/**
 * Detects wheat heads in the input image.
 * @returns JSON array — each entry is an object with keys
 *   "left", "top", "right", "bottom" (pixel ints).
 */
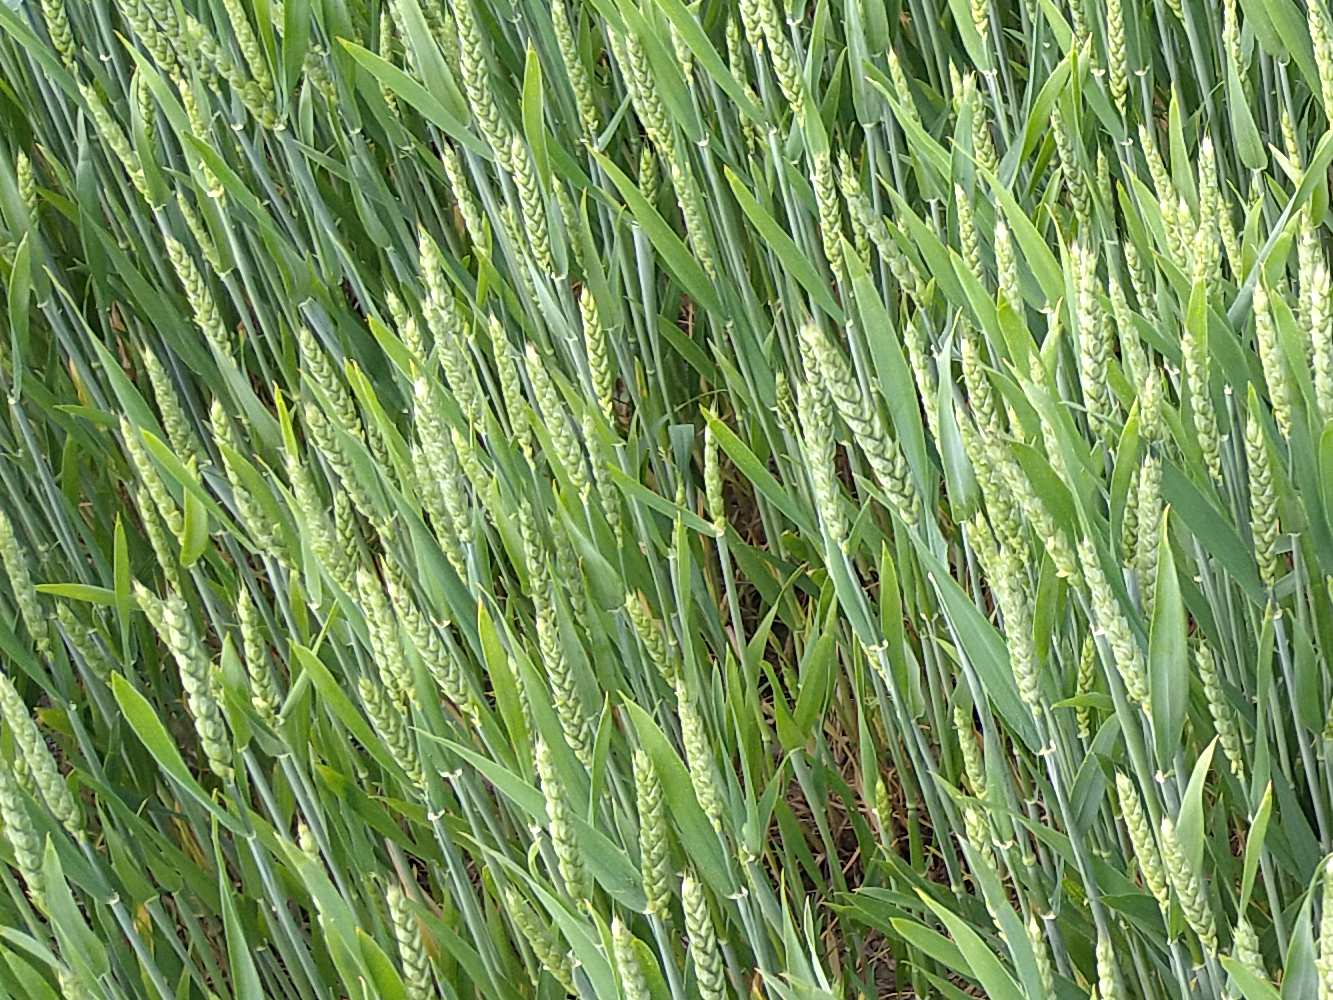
[
  {"left": 524, "top": 348, "right": 589, "bottom": 496},
  {"left": 774, "top": 368, "right": 794, "bottom": 425},
  {"left": 1115, "top": 773, "right": 1170, "bottom": 905},
  {"left": 167, "top": 238, "right": 235, "bottom": 367},
  {"left": 385, "top": 570, "right": 478, "bottom": 721},
  {"left": 1030, "top": 357, "right": 1075, "bottom": 483},
  {"left": 120, "top": 418, "right": 188, "bottom": 543},
  {"left": 97, "top": 603, "right": 112, "bottom": 631},
  {"left": 609, "top": 30, "right": 645, "bottom": 126},
  {"left": 1077, "top": 273, "right": 1116, "bottom": 431},
  {"left": 960, "top": 338, "right": 1010, "bottom": 456},
  {"left": 1013, "top": 0, "right": 1035, "bottom": 35},
  {"left": 444, "top": 6, "right": 457, "bottom": 79},
  {"left": 622, "top": 591, "right": 674, "bottom": 692},
  {"left": 1195, "top": 142, "right": 1222, "bottom": 224},
  {"left": 628, "top": 32, "right": 671, "bottom": 148},
  {"left": 838, "top": 150, "right": 870, "bottom": 277},
  {"left": 674, "top": 680, "right": 722, "bottom": 822},
  {"left": 350, "top": 573, "right": 411, "bottom": 717},
  {"left": 236, "top": 590, "right": 281, "bottom": 721},
  {"left": 903, "top": 320, "right": 943, "bottom": 456},
  {"left": 640, "top": 137, "right": 658, "bottom": 211},
  {"left": 953, "top": 707, "right": 990, "bottom": 800},
  {"left": 1160, "top": 819, "right": 1215, "bottom": 954},
  {"left": 996, "top": 222, "right": 1024, "bottom": 310},
  {"left": 407, "top": 322, "right": 426, "bottom": 369},
  {"left": 411, "top": 444, "right": 467, "bottom": 582},
  {"left": 966, "top": 812, "right": 1003, "bottom": 941},
  {"left": 1252, "top": 282, "right": 1294, "bottom": 437},
  {"left": 847, "top": 0, "right": 864, "bottom": 24},
  {"left": 56, "top": 603, "right": 112, "bottom": 691},
  {"left": 489, "top": 318, "right": 533, "bottom": 449},
  {"left": 680, "top": 880, "right": 732, "bottom": 1000},
  {"left": 548, "top": 519, "right": 584, "bottom": 611},
  {"left": 516, "top": 492, "right": 554, "bottom": 615},
  {"left": 797, "top": 328, "right": 833, "bottom": 422},
  {"left": 1297, "top": 213, "right": 1324, "bottom": 334},
  {"left": 14, "top": 152, "right": 38, "bottom": 229},
  {"left": 374, "top": 14, "right": 401, "bottom": 116},
  {"left": 975, "top": 514, "right": 1035, "bottom": 716},
  {"left": 1135, "top": 454, "right": 1164, "bottom": 619},
  {"left": 1125, "top": 242, "right": 1160, "bottom": 321},
  {"left": 1060, "top": 0, "right": 1086, "bottom": 48},
  {"left": 165, "top": 588, "right": 235, "bottom": 781},
  {"left": 970, "top": 93, "right": 994, "bottom": 182},
  {"left": 999, "top": 462, "right": 1074, "bottom": 588},
  {"left": 503, "top": 885, "right": 573, "bottom": 994},
  {"left": 441, "top": 143, "right": 484, "bottom": 248},
  {"left": 306, "top": 39, "right": 340, "bottom": 105},
  {"left": 575, "top": 284, "right": 614, "bottom": 426},
  {"left": 1183, "top": 333, "right": 1225, "bottom": 490},
  {"left": 303, "top": 403, "right": 380, "bottom": 525},
  {"left": 214, "top": 0, "right": 275, "bottom": 92},
  {"left": 1325, "top": 852, "right": 1333, "bottom": 991},
  {"left": 854, "top": 196, "right": 925, "bottom": 294},
  {"left": 874, "top": 779, "right": 895, "bottom": 853},
  {"left": 1240, "top": 421, "right": 1278, "bottom": 579},
  {"left": 208, "top": 401, "right": 296, "bottom": 567},
  {"left": 1052, "top": 102, "right": 1093, "bottom": 220},
  {"left": 546, "top": 173, "right": 584, "bottom": 263},
  {"left": 670, "top": 493, "right": 685, "bottom": 546},
  {"left": 1074, "top": 632, "right": 1093, "bottom": 737},
  {"left": 94, "top": 0, "right": 175, "bottom": 68},
  {"left": 582, "top": 416, "right": 620, "bottom": 549},
  {"left": 79, "top": 84, "right": 162, "bottom": 211},
  {"left": 285, "top": 458, "right": 361, "bottom": 608},
  {"left": 382, "top": 293, "right": 411, "bottom": 344},
  {"left": 610, "top": 915, "right": 675, "bottom": 1000},
  {"left": 1067, "top": 247, "right": 1103, "bottom": 333},
  {"left": 1315, "top": 264, "right": 1333, "bottom": 437},
  {"left": 0, "top": 759, "right": 43, "bottom": 908},
  {"left": 670, "top": 165, "right": 717, "bottom": 281},
  {"left": 361, "top": 680, "right": 426, "bottom": 790},
  {"left": 452, "top": 0, "right": 520, "bottom": 170},
  {"left": 793, "top": 383, "right": 854, "bottom": 549},
  {"left": 178, "top": 77, "right": 217, "bottom": 190},
  {"left": 1094, "top": 151, "right": 1112, "bottom": 213},
  {"left": 366, "top": 572, "right": 424, "bottom": 707},
  {"left": 176, "top": 191, "right": 222, "bottom": 276},
  {"left": 497, "top": 203, "right": 537, "bottom": 310},
  {"left": 1234, "top": 912, "right": 1268, "bottom": 979},
  {"left": 952, "top": 402, "right": 1038, "bottom": 578},
  {"left": 136, "top": 482, "right": 182, "bottom": 598},
  {"left": 0, "top": 513, "right": 54, "bottom": 664},
  {"left": 706, "top": 406, "right": 724, "bottom": 523},
  {"left": 1221, "top": 0, "right": 1239, "bottom": 65},
  {"left": 424, "top": 303, "right": 483, "bottom": 429},
  {"left": 889, "top": 47, "right": 917, "bottom": 129},
  {"left": 732, "top": 0, "right": 755, "bottom": 46},
  {"left": 1094, "top": 933, "right": 1127, "bottom": 1000},
  {"left": 0, "top": 675, "right": 82, "bottom": 833},
  {"left": 1162, "top": 195, "right": 1190, "bottom": 263},
  {"left": 969, "top": 0, "right": 990, "bottom": 33},
  {"left": 333, "top": 492, "right": 376, "bottom": 579},
  {"left": 301, "top": 330, "right": 361, "bottom": 443},
  {"left": 1136, "top": 126, "right": 1179, "bottom": 223},
  {"left": 145, "top": 350, "right": 207, "bottom": 463},
  {"left": 1325, "top": 652, "right": 1333, "bottom": 735},
  {"left": 659, "top": 0, "right": 692, "bottom": 63},
  {"left": 514, "top": 131, "right": 556, "bottom": 272},
  {"left": 956, "top": 182, "right": 982, "bottom": 281},
  {"left": 1115, "top": 466, "right": 1139, "bottom": 566},
  {"left": 132, "top": 584, "right": 171, "bottom": 646},
  {"left": 1108, "top": 0, "right": 1124, "bottom": 114},
  {"left": 533, "top": 745, "right": 591, "bottom": 913},
  {"left": 387, "top": 887, "right": 439, "bottom": 1000},
  {"left": 1280, "top": 110, "right": 1298, "bottom": 174},
  {"left": 1197, "top": 643, "right": 1247, "bottom": 777},
  {"left": 1079, "top": 540, "right": 1155, "bottom": 709},
  {"left": 966, "top": 523, "right": 985, "bottom": 582},
  {"left": 727, "top": 23, "right": 751, "bottom": 141},
  {"left": 507, "top": 656, "right": 541, "bottom": 778},
  {"left": 1190, "top": 222, "right": 1222, "bottom": 301},
  {"left": 549, "top": 1, "right": 592, "bottom": 136},
  {"left": 1030, "top": 928, "right": 1066, "bottom": 1000},
  {"left": 118, "top": 0, "right": 194, "bottom": 68},
  {"left": 183, "top": 19, "right": 276, "bottom": 123},
  {"left": 364, "top": 417, "right": 397, "bottom": 484},
  {"left": 23, "top": 0, "right": 82, "bottom": 71},
  {"left": 1304, "top": 14, "right": 1333, "bottom": 123},
  {"left": 538, "top": 617, "right": 597, "bottom": 777},
  {"left": 811, "top": 161, "right": 838, "bottom": 273},
  {"left": 802, "top": 330, "right": 919, "bottom": 530},
  {"left": 751, "top": 0, "right": 807, "bottom": 110},
  {"left": 1219, "top": 197, "right": 1242, "bottom": 286},
  {"left": 412, "top": 393, "right": 470, "bottom": 540},
  {"left": 632, "top": 754, "right": 670, "bottom": 910},
  {"left": 11, "top": 750, "right": 46, "bottom": 810},
  {"left": 419, "top": 226, "right": 459, "bottom": 334},
  {"left": 1108, "top": 280, "right": 1151, "bottom": 400}
]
